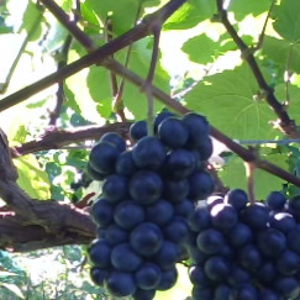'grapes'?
<instances>
[{
	"label": "grapes",
	"instance_id": "01657485",
	"mask_svg": "<svg viewBox=\"0 0 300 300\" xmlns=\"http://www.w3.org/2000/svg\"><path fill=\"white\" fill-rule=\"evenodd\" d=\"M129 128L134 143L103 134L90 151L88 176L103 181L91 213L100 223L88 246L92 281L117 297L151 300L173 287L180 258L194 262L192 300H300V196L280 191L265 204L246 192L214 191L205 162L209 120L158 113ZM205 201H203V202L202 201H196V200H190L192 198H194V197H196V196L199 197V198H206L205 199Z\"/></svg>",
	"mask_w": 300,
	"mask_h": 300
}]
</instances>
